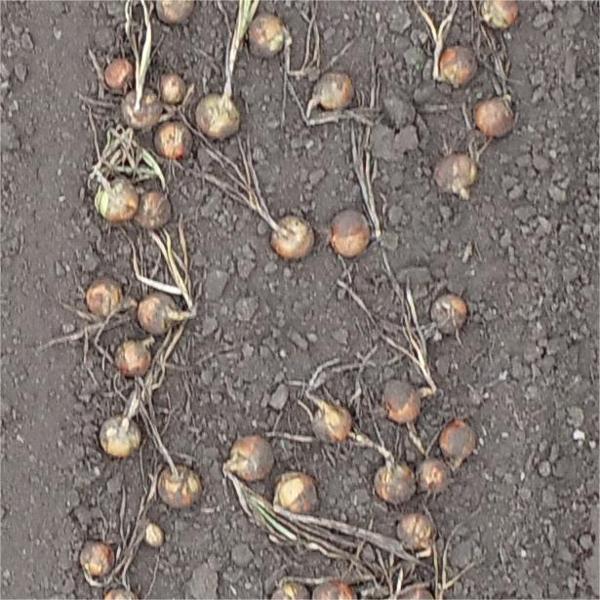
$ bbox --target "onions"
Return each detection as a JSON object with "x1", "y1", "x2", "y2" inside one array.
[
  {"x1": 436, "y1": 45, "x2": 476, "y2": 84},
  {"x1": 481, "y1": 0, "x2": 516, "y2": 30},
  {"x1": 273, "y1": 472, "x2": 316, "y2": 513},
  {"x1": 316, "y1": 72, "x2": 352, "y2": 110},
  {"x1": 381, "y1": 378, "x2": 421, "y2": 423},
  {"x1": 151, "y1": 120, "x2": 189, "y2": 159},
  {"x1": 122, "y1": 90, "x2": 161, "y2": 126},
  {"x1": 156, "y1": 72, "x2": 185, "y2": 102},
  {"x1": 373, "y1": 463, "x2": 413, "y2": 502},
  {"x1": 139, "y1": 296, "x2": 178, "y2": 331},
  {"x1": 102, "y1": 58, "x2": 133, "y2": 90},
  {"x1": 270, "y1": 215, "x2": 312, "y2": 258},
  {"x1": 227, "y1": 435, "x2": 272, "y2": 479},
  {"x1": 134, "y1": 188, "x2": 169, "y2": 225},
  {"x1": 104, "y1": 587, "x2": 140, "y2": 600},
  {"x1": 157, "y1": 0, "x2": 195, "y2": 24},
  {"x1": 431, "y1": 294, "x2": 467, "y2": 333},
  {"x1": 113, "y1": 338, "x2": 149, "y2": 375},
  {"x1": 398, "y1": 586, "x2": 434, "y2": 600},
  {"x1": 80, "y1": 540, "x2": 115, "y2": 578},
  {"x1": 271, "y1": 579, "x2": 309, "y2": 599},
  {"x1": 471, "y1": 95, "x2": 513, "y2": 137},
  {"x1": 98, "y1": 418, "x2": 137, "y2": 459},
  {"x1": 415, "y1": 457, "x2": 448, "y2": 491},
  {"x1": 158, "y1": 467, "x2": 201, "y2": 509},
  {"x1": 436, "y1": 419, "x2": 475, "y2": 460},
  {"x1": 85, "y1": 275, "x2": 122, "y2": 315},
  {"x1": 316, "y1": 578, "x2": 358, "y2": 599},
  {"x1": 94, "y1": 181, "x2": 135, "y2": 221},
  {"x1": 326, "y1": 209, "x2": 368, "y2": 257},
  {"x1": 193, "y1": 92, "x2": 239, "y2": 138},
  {"x1": 309, "y1": 400, "x2": 351, "y2": 440},
  {"x1": 247, "y1": 14, "x2": 286, "y2": 56},
  {"x1": 396, "y1": 512, "x2": 435, "y2": 550},
  {"x1": 435, "y1": 152, "x2": 476, "y2": 192}
]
